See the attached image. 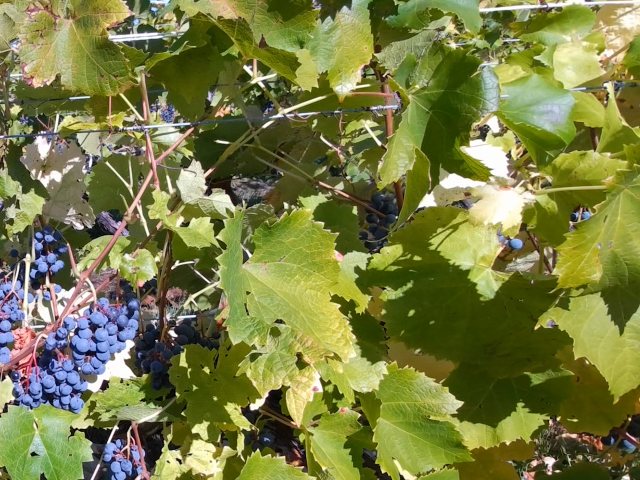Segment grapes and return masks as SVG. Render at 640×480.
<instances>
[{
  "mask_svg": "<svg viewBox=\"0 0 640 480\" xmlns=\"http://www.w3.org/2000/svg\"><path fill=\"white\" fill-rule=\"evenodd\" d=\"M18 298L14 295L9 297V301L2 305L1 312L5 314V318L0 323V363L8 364L11 362V350L7 347V343H14L16 336L10 333L12 323L23 320V311L18 307Z\"/></svg>",
  "mask_w": 640,
  "mask_h": 480,
  "instance_id": "grapes-4",
  "label": "grapes"
},
{
  "mask_svg": "<svg viewBox=\"0 0 640 480\" xmlns=\"http://www.w3.org/2000/svg\"><path fill=\"white\" fill-rule=\"evenodd\" d=\"M123 292L129 300L125 307L110 306L109 299L101 297L84 310L77 327L73 317H65L60 328L47 336L45 350L64 349L72 331V359H52L47 371L35 367L27 378L29 393L22 388L21 374L10 373L11 395L20 406L49 405L53 394L56 409L74 413L84 410L81 392L88 390V381L80 377L76 367L85 376L102 375L112 356L127 348V340H133L140 327L138 296L131 285H125Z\"/></svg>",
  "mask_w": 640,
  "mask_h": 480,
  "instance_id": "grapes-1",
  "label": "grapes"
},
{
  "mask_svg": "<svg viewBox=\"0 0 640 480\" xmlns=\"http://www.w3.org/2000/svg\"><path fill=\"white\" fill-rule=\"evenodd\" d=\"M125 448L124 439H116L115 443L109 442L103 447L104 453L102 460L110 463L111 480H125L127 476L140 475L142 473L140 464L134 465L135 461H139V450L137 445H133L130 449L132 459L127 460L123 456H119L113 460L116 452Z\"/></svg>",
  "mask_w": 640,
  "mask_h": 480,
  "instance_id": "grapes-3",
  "label": "grapes"
},
{
  "mask_svg": "<svg viewBox=\"0 0 640 480\" xmlns=\"http://www.w3.org/2000/svg\"><path fill=\"white\" fill-rule=\"evenodd\" d=\"M62 237L63 233L61 231H55L52 226H45L42 231H36L34 233L33 245L36 259L30 271V276L33 279H39L41 275L47 274L49 268L53 273H58L66 267L64 261L58 260L60 255H65L68 252V245L66 243L61 242L58 248H54L49 252V255L42 254L44 242L53 245L60 241Z\"/></svg>",
  "mask_w": 640,
  "mask_h": 480,
  "instance_id": "grapes-2",
  "label": "grapes"
}]
</instances>
